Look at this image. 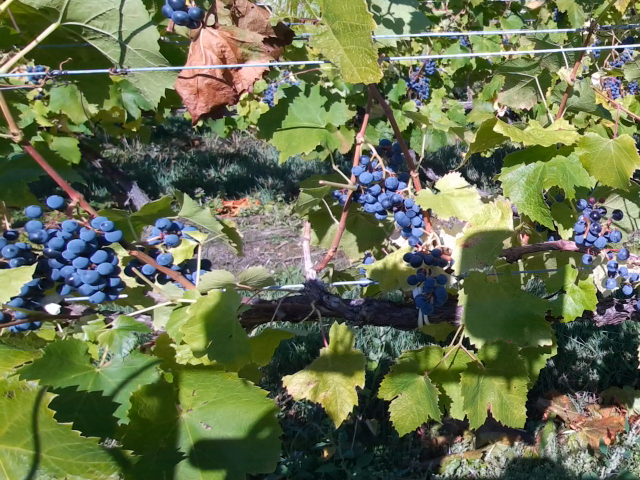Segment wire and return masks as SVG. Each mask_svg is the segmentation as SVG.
I'll use <instances>...</instances> for the list:
<instances>
[{"label": "wire", "instance_id": "wire-2", "mask_svg": "<svg viewBox=\"0 0 640 480\" xmlns=\"http://www.w3.org/2000/svg\"><path fill=\"white\" fill-rule=\"evenodd\" d=\"M628 50H640V43H626L617 46H550L520 50H505L497 52L487 51H462V52H435L432 54H393L380 55V62L396 61H434L438 59H465L485 58L499 59L507 57H523L552 53H619Z\"/></svg>", "mask_w": 640, "mask_h": 480}, {"label": "wire", "instance_id": "wire-4", "mask_svg": "<svg viewBox=\"0 0 640 480\" xmlns=\"http://www.w3.org/2000/svg\"><path fill=\"white\" fill-rule=\"evenodd\" d=\"M557 266H550L543 269H521V270H486V277H523V276H545L557 273Z\"/></svg>", "mask_w": 640, "mask_h": 480}, {"label": "wire", "instance_id": "wire-3", "mask_svg": "<svg viewBox=\"0 0 640 480\" xmlns=\"http://www.w3.org/2000/svg\"><path fill=\"white\" fill-rule=\"evenodd\" d=\"M589 25L575 27H529L518 30L505 29H478V30H451V31H421L409 32H378L373 33V40L380 39H407L419 40L423 38H454V37H480V36H503L520 37L531 34H577L589 32Z\"/></svg>", "mask_w": 640, "mask_h": 480}, {"label": "wire", "instance_id": "wire-5", "mask_svg": "<svg viewBox=\"0 0 640 480\" xmlns=\"http://www.w3.org/2000/svg\"><path fill=\"white\" fill-rule=\"evenodd\" d=\"M376 284L374 279L366 280V279H353L349 281L345 280H332L330 285L332 287H340V288H352L355 286H364V287H372Z\"/></svg>", "mask_w": 640, "mask_h": 480}, {"label": "wire", "instance_id": "wire-6", "mask_svg": "<svg viewBox=\"0 0 640 480\" xmlns=\"http://www.w3.org/2000/svg\"><path fill=\"white\" fill-rule=\"evenodd\" d=\"M305 283L303 281H295L292 283H271L265 284L263 286V290L265 292L274 291V290H294L297 288H303Z\"/></svg>", "mask_w": 640, "mask_h": 480}, {"label": "wire", "instance_id": "wire-1", "mask_svg": "<svg viewBox=\"0 0 640 480\" xmlns=\"http://www.w3.org/2000/svg\"><path fill=\"white\" fill-rule=\"evenodd\" d=\"M323 59H311L300 61H244L241 63H232L228 65H215L208 63H195L186 65H170V66H129L120 69H93V68H71V69H52L44 72L39 71H0L1 79L10 78H37L46 79L54 76H73V75H91V76H123L132 73H172V72H188L197 70H206L213 72H230L234 70H243L246 68H303L313 66H323Z\"/></svg>", "mask_w": 640, "mask_h": 480}]
</instances>
